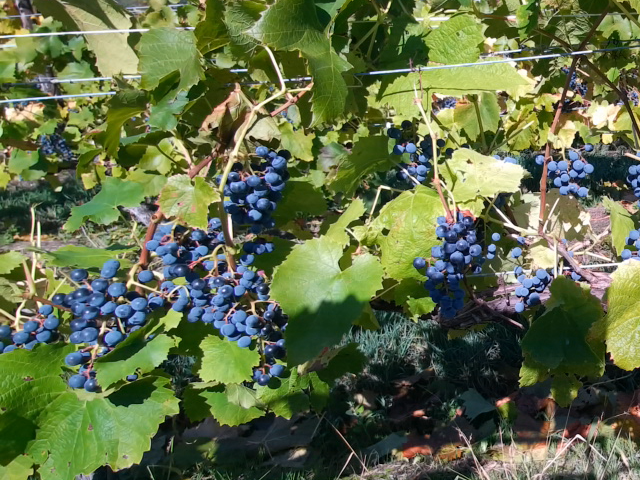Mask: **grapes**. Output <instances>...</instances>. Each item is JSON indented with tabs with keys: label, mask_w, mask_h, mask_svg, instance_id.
<instances>
[{
	"label": "grapes",
	"mask_w": 640,
	"mask_h": 480,
	"mask_svg": "<svg viewBox=\"0 0 640 480\" xmlns=\"http://www.w3.org/2000/svg\"><path fill=\"white\" fill-rule=\"evenodd\" d=\"M172 224L159 225L151 240L144 243V248L148 251H156L160 256V263L165 265L164 277L166 279L185 278L188 283L186 287H179L176 290L177 297L172 303V309L181 312L185 306L188 307L187 321L189 323L198 322L200 319L205 324L213 322V326L224 337H228L230 342H237L242 348H247L252 344L251 336L258 335L275 343L264 347L266 362L272 366L269 372L274 378H279L285 371L283 364L275 363V359H283L286 356V341L280 332L289 327L288 323L279 327L275 331L271 325L261 327V322L256 315H248L245 310H237L232 313L228 322L226 312L231 311L235 306V301L229 299L231 296L241 297L246 293V289L257 294L259 301L268 298L269 287L263 278L253 270H248L245 266H251L255 262V254L273 253L275 246L272 242H267L263 237H259L252 242H246L243 249L246 255H241L239 263L234 267V272L240 276L238 285L231 286L226 282L233 279L231 272H223L220 276H210L207 280L201 278L197 272H191L187 266L191 261L196 262L200 257H204L209 252L208 246L198 247L179 246L176 243H165L160 245L166 235L172 233Z\"/></svg>",
	"instance_id": "1"
},
{
	"label": "grapes",
	"mask_w": 640,
	"mask_h": 480,
	"mask_svg": "<svg viewBox=\"0 0 640 480\" xmlns=\"http://www.w3.org/2000/svg\"><path fill=\"white\" fill-rule=\"evenodd\" d=\"M625 243L627 245H633L635 243V249L637 255H633V252L628 248H624L621 251V259L622 261H627L629 259H635L636 261H640V229L631 230L628 236L625 238Z\"/></svg>",
	"instance_id": "10"
},
{
	"label": "grapes",
	"mask_w": 640,
	"mask_h": 480,
	"mask_svg": "<svg viewBox=\"0 0 640 480\" xmlns=\"http://www.w3.org/2000/svg\"><path fill=\"white\" fill-rule=\"evenodd\" d=\"M266 308L263 311V318L267 321L273 320L275 318V314L279 312V306L274 303H268Z\"/></svg>",
	"instance_id": "13"
},
{
	"label": "grapes",
	"mask_w": 640,
	"mask_h": 480,
	"mask_svg": "<svg viewBox=\"0 0 640 480\" xmlns=\"http://www.w3.org/2000/svg\"><path fill=\"white\" fill-rule=\"evenodd\" d=\"M258 158H265V173L262 179L256 175H249L245 181L236 171H231L227 180L224 196L227 199L222 204L226 214H232L237 224L251 221L250 231L258 234L261 228L272 229L275 220L270 214L276 209L280 201V191L285 188V181L290 173L283 168L291 159V153L282 149L278 153L268 145H258L255 148Z\"/></svg>",
	"instance_id": "4"
},
{
	"label": "grapes",
	"mask_w": 640,
	"mask_h": 480,
	"mask_svg": "<svg viewBox=\"0 0 640 480\" xmlns=\"http://www.w3.org/2000/svg\"><path fill=\"white\" fill-rule=\"evenodd\" d=\"M627 173L629 175L626 181L630 183V186L633 188L634 196L638 198L636 200V206L640 208V163H632L627 169Z\"/></svg>",
	"instance_id": "11"
},
{
	"label": "grapes",
	"mask_w": 640,
	"mask_h": 480,
	"mask_svg": "<svg viewBox=\"0 0 640 480\" xmlns=\"http://www.w3.org/2000/svg\"><path fill=\"white\" fill-rule=\"evenodd\" d=\"M568 159L572 162V170L569 171V164L565 160L559 162L550 160L549 172L547 176L553 178V184L556 187H560L558 193L563 196H567L570 193L577 197H587L589 195V189L582 187L578 183H569L571 179L577 177L583 179L586 175H590L594 170L592 163H585L580 159V154L575 150L568 152Z\"/></svg>",
	"instance_id": "6"
},
{
	"label": "grapes",
	"mask_w": 640,
	"mask_h": 480,
	"mask_svg": "<svg viewBox=\"0 0 640 480\" xmlns=\"http://www.w3.org/2000/svg\"><path fill=\"white\" fill-rule=\"evenodd\" d=\"M428 161L429 156L427 154H420L417 157L418 164H407L405 169L409 175H416L418 181L424 182L427 178V172L431 170V164Z\"/></svg>",
	"instance_id": "9"
},
{
	"label": "grapes",
	"mask_w": 640,
	"mask_h": 480,
	"mask_svg": "<svg viewBox=\"0 0 640 480\" xmlns=\"http://www.w3.org/2000/svg\"><path fill=\"white\" fill-rule=\"evenodd\" d=\"M91 358L89 351L71 350L64 359V364L69 367H77L79 364L87 363Z\"/></svg>",
	"instance_id": "12"
},
{
	"label": "grapes",
	"mask_w": 640,
	"mask_h": 480,
	"mask_svg": "<svg viewBox=\"0 0 640 480\" xmlns=\"http://www.w3.org/2000/svg\"><path fill=\"white\" fill-rule=\"evenodd\" d=\"M89 368L85 365L78 367V374H73L69 378V385L73 388H84L88 392L99 393L101 391V385L96 383L94 379L87 377Z\"/></svg>",
	"instance_id": "8"
},
{
	"label": "grapes",
	"mask_w": 640,
	"mask_h": 480,
	"mask_svg": "<svg viewBox=\"0 0 640 480\" xmlns=\"http://www.w3.org/2000/svg\"><path fill=\"white\" fill-rule=\"evenodd\" d=\"M54 307L51 305H42L37 308V314L39 316H45L43 321V326H40L38 321H25L23 323L22 331H18L16 333L13 332V329L10 325L0 324V338H6L7 340H12L13 344H8L7 346L3 341H0V352H13L17 349V345H22L26 350H31L34 346L39 344H45L48 339L52 337V330L56 329L60 326V320L53 315ZM35 332L34 339L31 342L29 341V333Z\"/></svg>",
	"instance_id": "5"
},
{
	"label": "grapes",
	"mask_w": 640,
	"mask_h": 480,
	"mask_svg": "<svg viewBox=\"0 0 640 480\" xmlns=\"http://www.w3.org/2000/svg\"><path fill=\"white\" fill-rule=\"evenodd\" d=\"M523 269L520 266H516L513 269V274L518 277V281L522 283V286H518L515 289V294L518 297H527V304L529 306H535L540 301V295L537 292H541L545 289L551 281V276L545 269H538L536 271V277L529 279L526 275H521Z\"/></svg>",
	"instance_id": "7"
},
{
	"label": "grapes",
	"mask_w": 640,
	"mask_h": 480,
	"mask_svg": "<svg viewBox=\"0 0 640 480\" xmlns=\"http://www.w3.org/2000/svg\"><path fill=\"white\" fill-rule=\"evenodd\" d=\"M120 268V262L109 259L100 270L101 278L91 280V288L81 285L68 294L57 293L52 300L61 306L71 307V312L77 317L70 323V342L75 345H90L97 343L98 328L95 318L101 315L114 313L121 318L124 327H130L129 333H124L117 327H112L103 337V342L108 346H117L130 333L141 328L140 324L146 321V313L152 309L161 308L165 299L149 293L147 299L138 291H127L125 282H114L107 286L108 278H112Z\"/></svg>",
	"instance_id": "2"
},
{
	"label": "grapes",
	"mask_w": 640,
	"mask_h": 480,
	"mask_svg": "<svg viewBox=\"0 0 640 480\" xmlns=\"http://www.w3.org/2000/svg\"><path fill=\"white\" fill-rule=\"evenodd\" d=\"M439 226L435 229V234L444 240L443 244H434L431 247V254L439 259L425 269V275L430 278L425 281V288L429 291V297L439 304V314L445 320H452L456 313L464 307L465 291L460 288L459 281L464 278L462 269L471 268L473 274H480L484 270L483 263L488 259H495L496 245L494 243L486 246V257L482 254L483 247L476 242V230L472 226L474 218L464 217L462 212L456 215L454 224L447 222L445 216L437 217ZM447 271V281L449 289L454 291V296L441 294L439 289H434L436 284L445 280Z\"/></svg>",
	"instance_id": "3"
}]
</instances>
